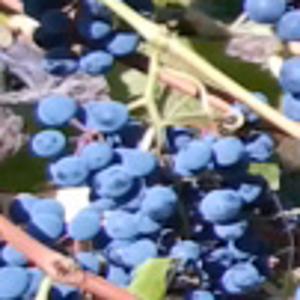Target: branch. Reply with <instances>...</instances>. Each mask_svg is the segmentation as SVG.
<instances>
[{
  "instance_id": "obj_3",
  "label": "branch",
  "mask_w": 300,
  "mask_h": 300,
  "mask_svg": "<svg viewBox=\"0 0 300 300\" xmlns=\"http://www.w3.org/2000/svg\"><path fill=\"white\" fill-rule=\"evenodd\" d=\"M155 76L157 79L189 93L193 98L203 97L201 85L196 80L186 79L181 75L170 73L167 70L156 71Z\"/></svg>"
},
{
  "instance_id": "obj_4",
  "label": "branch",
  "mask_w": 300,
  "mask_h": 300,
  "mask_svg": "<svg viewBox=\"0 0 300 300\" xmlns=\"http://www.w3.org/2000/svg\"><path fill=\"white\" fill-rule=\"evenodd\" d=\"M119 63H126L127 66L136 68L144 74H149L152 66V57L145 52H135L124 58L118 59Z\"/></svg>"
},
{
  "instance_id": "obj_1",
  "label": "branch",
  "mask_w": 300,
  "mask_h": 300,
  "mask_svg": "<svg viewBox=\"0 0 300 300\" xmlns=\"http://www.w3.org/2000/svg\"><path fill=\"white\" fill-rule=\"evenodd\" d=\"M105 5L112 14L137 28L149 39L161 41L162 46L185 68L209 82L208 98L212 103L222 109H229L235 104L248 114L300 139V121L254 97L233 75L195 53L179 35L161 26L150 15L125 0H105Z\"/></svg>"
},
{
  "instance_id": "obj_2",
  "label": "branch",
  "mask_w": 300,
  "mask_h": 300,
  "mask_svg": "<svg viewBox=\"0 0 300 300\" xmlns=\"http://www.w3.org/2000/svg\"><path fill=\"white\" fill-rule=\"evenodd\" d=\"M0 242L29 256L44 273L75 284L102 300H146L99 272L77 263L70 256L44 245L31 231L3 216H0Z\"/></svg>"
}]
</instances>
